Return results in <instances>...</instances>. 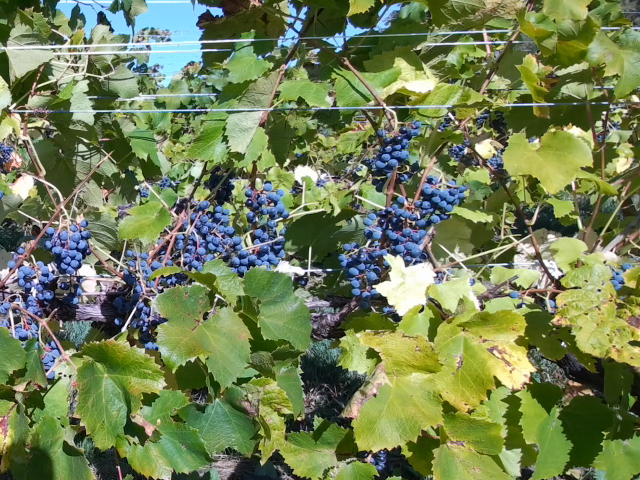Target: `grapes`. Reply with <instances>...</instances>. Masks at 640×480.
<instances>
[{
	"label": "grapes",
	"mask_w": 640,
	"mask_h": 480,
	"mask_svg": "<svg viewBox=\"0 0 640 480\" xmlns=\"http://www.w3.org/2000/svg\"><path fill=\"white\" fill-rule=\"evenodd\" d=\"M26 249L24 247L18 246L16 251L12 253L11 259L7 262V267L12 269L13 265L19 260V255H22Z\"/></svg>",
	"instance_id": "802abce8"
},
{
	"label": "grapes",
	"mask_w": 640,
	"mask_h": 480,
	"mask_svg": "<svg viewBox=\"0 0 640 480\" xmlns=\"http://www.w3.org/2000/svg\"><path fill=\"white\" fill-rule=\"evenodd\" d=\"M123 280L127 281L129 286H133L132 291V299H124L120 296H116L112 299V304L117 308V312L120 315H124L128 310L135 308V316L137 320H133L131 322V327L133 329H139V332L142 334V339L144 341H149L151 339V335L148 332L150 325H161L167 322L165 317L161 316H151V308L145 302L138 301L142 298V285L138 282V276L136 274H130L127 269L122 271Z\"/></svg>",
	"instance_id": "5460f4e3"
},
{
	"label": "grapes",
	"mask_w": 640,
	"mask_h": 480,
	"mask_svg": "<svg viewBox=\"0 0 640 480\" xmlns=\"http://www.w3.org/2000/svg\"><path fill=\"white\" fill-rule=\"evenodd\" d=\"M422 122L420 120H413L411 127L401 126L399 128V135H395L393 138L384 137L386 130L381 128L377 131L378 136L384 137L385 145L379 147L381 154L376 155L375 167L385 171V176L390 178V173L394 167L404 162L410 156L408 150L411 143V138L417 136L421 131Z\"/></svg>",
	"instance_id": "f8a65327"
},
{
	"label": "grapes",
	"mask_w": 640,
	"mask_h": 480,
	"mask_svg": "<svg viewBox=\"0 0 640 480\" xmlns=\"http://www.w3.org/2000/svg\"><path fill=\"white\" fill-rule=\"evenodd\" d=\"M263 190L268 192L266 197L261 194H257L254 197V191L247 189L244 192L245 205L252 207L250 211L245 213L246 220L249 224H255L257 222L256 211L262 215L267 214L269 221L267 226L271 229V234L266 233L267 228L260 226L254 230V239L252 244L259 246L257 253H251L248 249H243L242 239L235 235L236 229L233 226H225L224 224L229 221L227 217L231 210L229 208L223 209L221 205H215L211 211V203L209 201L201 200L199 204L195 206V210L191 213L190 219L195 221L193 232L189 234V240L185 247L186 236L184 234H178L173 246L177 250H183L182 263L187 266L190 271L195 270L201 272L203 270V262H212L215 258L213 253L207 254V249L210 251H216L224 257H228L230 252L227 250V246L231 252L238 251L237 256L231 260V266L229 270L234 274H240L248 272L250 270V264L256 266H264L266 270H270L273 266L279 264V259L285 256L283 251V245L286 243L287 229L282 227L278 231V225L276 220L280 217L287 219L289 217V211L285 209L284 203L281 200L285 196L282 189H278L275 193L270 192L272 190V183L265 181L263 183Z\"/></svg>",
	"instance_id": "01657485"
},
{
	"label": "grapes",
	"mask_w": 640,
	"mask_h": 480,
	"mask_svg": "<svg viewBox=\"0 0 640 480\" xmlns=\"http://www.w3.org/2000/svg\"><path fill=\"white\" fill-rule=\"evenodd\" d=\"M160 281L162 283H166L167 285H183L187 282V279L182 276L180 273H176L173 276L172 275H168L167 277L162 276L160 278Z\"/></svg>",
	"instance_id": "dcf779d0"
},
{
	"label": "grapes",
	"mask_w": 640,
	"mask_h": 480,
	"mask_svg": "<svg viewBox=\"0 0 640 480\" xmlns=\"http://www.w3.org/2000/svg\"><path fill=\"white\" fill-rule=\"evenodd\" d=\"M36 266L41 272L37 275V281H28L27 278L34 277L36 275V271L27 265H21L17 270V277L19 279L17 281V285L22 287L26 293H29L33 288L37 291L35 296L29 295L26 298V302H22L20 307L25 309L28 313L41 318L43 316V310L40 308L37 301H41L46 305L49 301L55 298V293L51 289H46V285L52 282L55 278L54 274L49 272V268L43 261H38Z\"/></svg>",
	"instance_id": "83cd7487"
},
{
	"label": "grapes",
	"mask_w": 640,
	"mask_h": 480,
	"mask_svg": "<svg viewBox=\"0 0 640 480\" xmlns=\"http://www.w3.org/2000/svg\"><path fill=\"white\" fill-rule=\"evenodd\" d=\"M631 268L632 265L630 263H623L622 270L612 272L611 284L614 286L615 291H619L621 289V286L625 284L624 278L621 276L623 272H626Z\"/></svg>",
	"instance_id": "54f908b8"
},
{
	"label": "grapes",
	"mask_w": 640,
	"mask_h": 480,
	"mask_svg": "<svg viewBox=\"0 0 640 480\" xmlns=\"http://www.w3.org/2000/svg\"><path fill=\"white\" fill-rule=\"evenodd\" d=\"M388 250L381 247H375L374 250L361 247L357 254H352L349 258H345L343 254L337 257V262L342 268H345L344 279L349 282L352 287L350 293L354 297H361L360 308L368 309L370 306L369 299L373 296L377 298L379 296L376 288H370L368 291H362V281L357 278L364 271L366 278L369 281L375 282L377 280L376 273H380L382 268L373 261V257L387 256Z\"/></svg>",
	"instance_id": "84f90ec7"
},
{
	"label": "grapes",
	"mask_w": 640,
	"mask_h": 480,
	"mask_svg": "<svg viewBox=\"0 0 640 480\" xmlns=\"http://www.w3.org/2000/svg\"><path fill=\"white\" fill-rule=\"evenodd\" d=\"M438 181L439 178L437 176L428 175L426 183L423 184L421 189L422 199L414 202L416 209L420 210L419 216L421 218L412 214L409 210L399 208L397 203L391 204L377 213L371 212L368 218L363 220V224L366 226L363 234L367 238L375 240L371 242V245H379V240L386 235L392 243L391 251L395 252L404 262H412V265L416 266L421 264L422 260H428L429 254L418 248L423 244V238L427 234L424 228L447 221L450 215L446 211L453 212L455 210L454 205L459 206L461 204V200L465 198L464 192L468 190L466 185L455 188L456 182L454 180H448L446 185L450 188H445L444 190L431 187L436 185ZM379 218V225L370 228L373 221ZM402 218L414 222L420 229L416 232H413L410 228L403 229Z\"/></svg>",
	"instance_id": "b958b902"
},
{
	"label": "grapes",
	"mask_w": 640,
	"mask_h": 480,
	"mask_svg": "<svg viewBox=\"0 0 640 480\" xmlns=\"http://www.w3.org/2000/svg\"><path fill=\"white\" fill-rule=\"evenodd\" d=\"M68 230L72 233L69 236L67 231L59 234L53 227L45 230V234L50 239L42 242V247L46 252H50L55 258V265L59 274H72L76 269L83 266V261L90 254L89 244L92 235L87 230H79L77 225H70Z\"/></svg>",
	"instance_id": "0513c4c2"
},
{
	"label": "grapes",
	"mask_w": 640,
	"mask_h": 480,
	"mask_svg": "<svg viewBox=\"0 0 640 480\" xmlns=\"http://www.w3.org/2000/svg\"><path fill=\"white\" fill-rule=\"evenodd\" d=\"M75 281L78 284L73 286L72 292H68L62 297L64 304H78L80 302V297L83 295V289L79 284L84 282V278H75Z\"/></svg>",
	"instance_id": "1ff8f66d"
},
{
	"label": "grapes",
	"mask_w": 640,
	"mask_h": 480,
	"mask_svg": "<svg viewBox=\"0 0 640 480\" xmlns=\"http://www.w3.org/2000/svg\"><path fill=\"white\" fill-rule=\"evenodd\" d=\"M45 347L47 349H51L45 353V356L42 358L43 369L45 371H49L47 374V378L49 380H53L56 377V372L54 370H50L51 366L56 362L61 356V352L58 350V346L53 340H49L45 343Z\"/></svg>",
	"instance_id": "ef6de9ee"
},
{
	"label": "grapes",
	"mask_w": 640,
	"mask_h": 480,
	"mask_svg": "<svg viewBox=\"0 0 640 480\" xmlns=\"http://www.w3.org/2000/svg\"><path fill=\"white\" fill-rule=\"evenodd\" d=\"M26 324L29 326V328L27 327L23 328L21 324H17L14 327V330L10 329L9 337L10 338L15 337L16 339L26 340L31 335L34 339H37L39 337V333L37 332L39 330V325L34 322V318L32 316H29L26 319Z\"/></svg>",
	"instance_id": "2adb6a1f"
},
{
	"label": "grapes",
	"mask_w": 640,
	"mask_h": 480,
	"mask_svg": "<svg viewBox=\"0 0 640 480\" xmlns=\"http://www.w3.org/2000/svg\"><path fill=\"white\" fill-rule=\"evenodd\" d=\"M166 253V249L163 248L159 253H158V261L157 260H153L150 263V266L147 264L146 260L148 257V253L147 252H140L138 254V258L141 260L140 262V270L142 271L140 273V278L144 281V285L148 288H152L153 285V280L149 279L150 276H152L154 274V271H156L157 269H160L164 266V264L162 263L163 257Z\"/></svg>",
	"instance_id": "e5b3c951"
},
{
	"label": "grapes",
	"mask_w": 640,
	"mask_h": 480,
	"mask_svg": "<svg viewBox=\"0 0 640 480\" xmlns=\"http://www.w3.org/2000/svg\"><path fill=\"white\" fill-rule=\"evenodd\" d=\"M387 457V452L386 451H379L377 453V457L375 458L374 456L370 457V461L373 465V467L377 470V471H383L386 469V464L388 463V460L386 459Z\"/></svg>",
	"instance_id": "91a60905"
}]
</instances>
